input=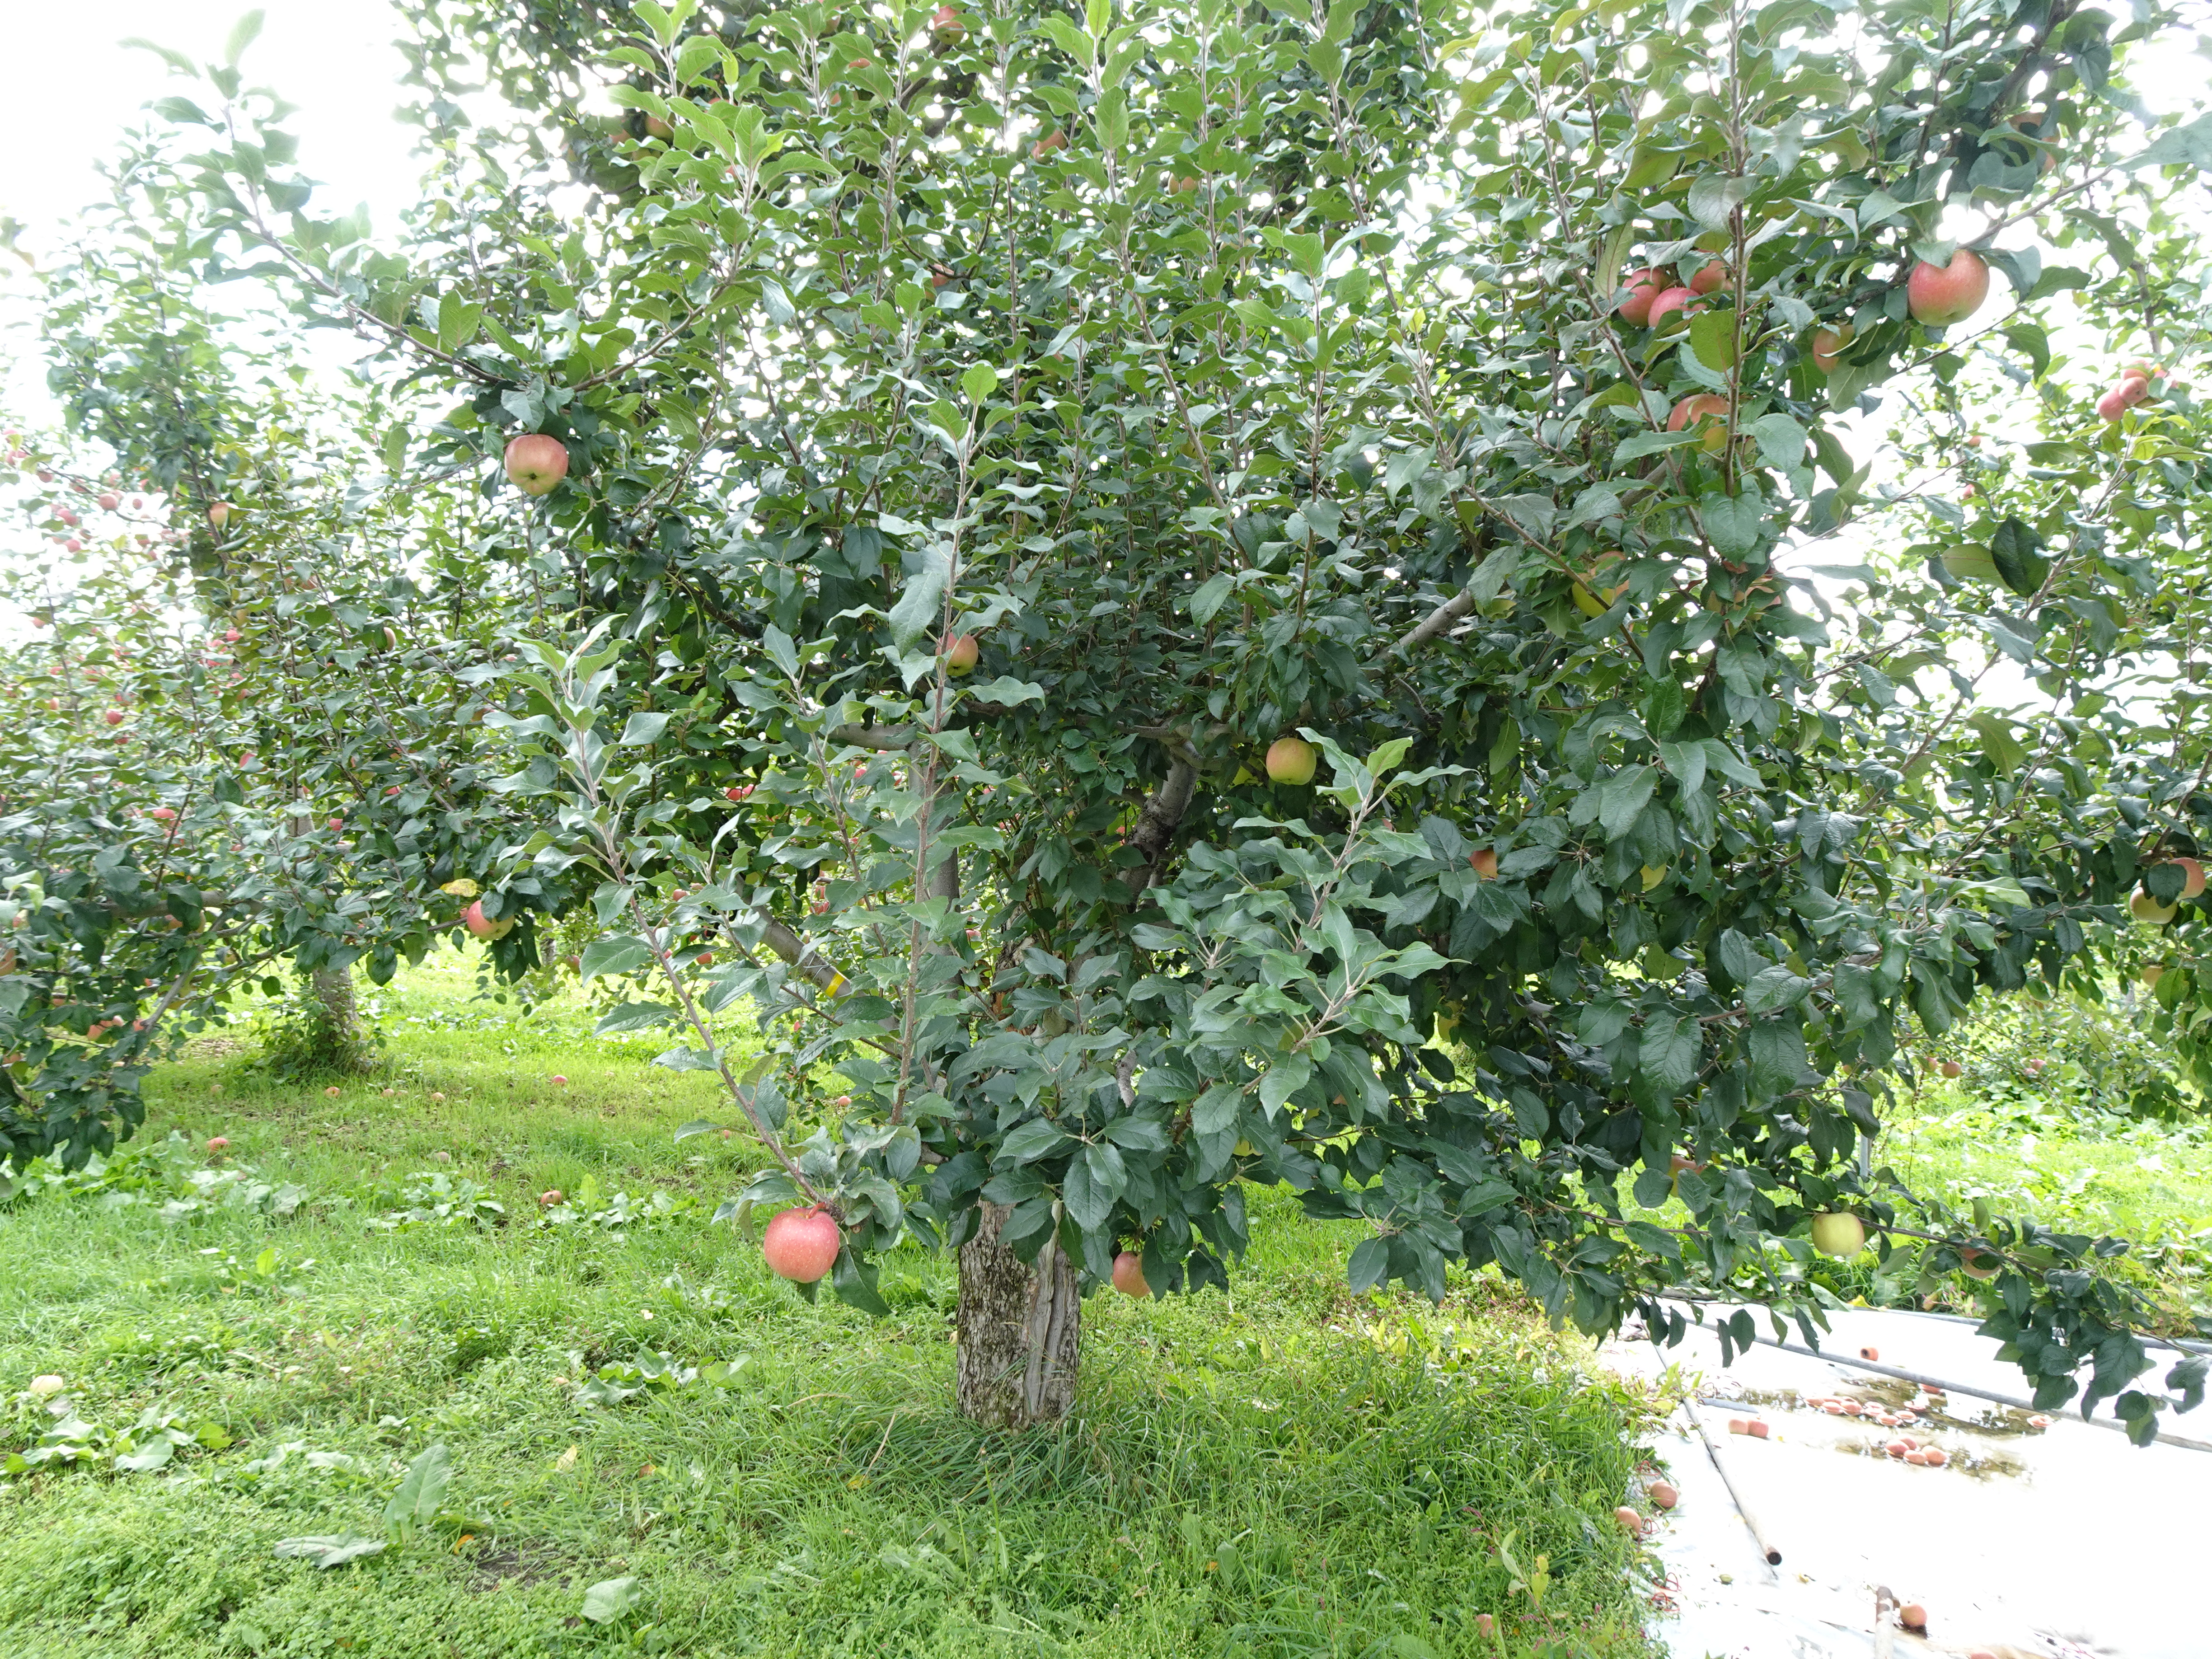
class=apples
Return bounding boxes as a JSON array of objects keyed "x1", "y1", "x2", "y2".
[
  {"x1": 2024, "y1": 1058, "x2": 2056, "y2": 1081},
  {"x1": 785, "y1": 1064, "x2": 806, "y2": 1083},
  {"x1": 832, "y1": 1094, "x2": 854, "y2": 1113},
  {"x1": 2130, "y1": 883, "x2": 2180, "y2": 926},
  {"x1": 646, "y1": 101, "x2": 684, "y2": 145},
  {"x1": 176, "y1": 911, "x2": 206, "y2": 936},
  {"x1": 298, "y1": 780, "x2": 313, "y2": 794},
  {"x1": 963, "y1": 927, "x2": 984, "y2": 950},
  {"x1": 454, "y1": 904, "x2": 471, "y2": 927},
  {"x1": 793, "y1": 572, "x2": 808, "y2": 587},
  {"x1": 1956, "y1": 1232, "x2": 2006, "y2": 1283},
  {"x1": 2148, "y1": 855, "x2": 2207, "y2": 903},
  {"x1": 823, "y1": 55, "x2": 882, "y2": 112},
  {"x1": 142, "y1": 975, "x2": 154, "y2": 989},
  {"x1": 643, "y1": 736, "x2": 663, "y2": 754},
  {"x1": 440, "y1": 677, "x2": 457, "y2": 695},
  {"x1": 2117, "y1": 376, "x2": 2148, "y2": 407},
  {"x1": 129, "y1": 603, "x2": 150, "y2": 620},
  {"x1": 1958, "y1": 479, "x2": 1986, "y2": 508},
  {"x1": 876, "y1": 744, "x2": 892, "y2": 763},
  {"x1": 1467, "y1": 842, "x2": 1515, "y2": 889},
  {"x1": 382, "y1": 782, "x2": 402, "y2": 800},
  {"x1": 122, "y1": 1017, "x2": 147, "y2": 1036},
  {"x1": 325, "y1": 659, "x2": 338, "y2": 673},
  {"x1": 1300, "y1": 1087, "x2": 1352, "y2": 1137},
  {"x1": 175, "y1": 866, "x2": 193, "y2": 883},
  {"x1": 1676, "y1": 245, "x2": 1727, "y2": 296},
  {"x1": 69, "y1": 476, "x2": 90, "y2": 494},
  {"x1": 1605, "y1": 829, "x2": 1668, "y2": 899},
  {"x1": 699, "y1": 93, "x2": 738, "y2": 125},
  {"x1": 974, "y1": 760, "x2": 986, "y2": 771},
  {"x1": 89, "y1": 1016, "x2": 122, "y2": 1045},
  {"x1": 1435, "y1": 996, "x2": 1481, "y2": 1043},
  {"x1": 1808, "y1": 319, "x2": 1874, "y2": 380},
  {"x1": 99, "y1": 491, "x2": 117, "y2": 511},
  {"x1": 35, "y1": 468, "x2": 56, "y2": 483},
  {"x1": 659, "y1": 946, "x2": 673, "y2": 959},
  {"x1": 150, "y1": 805, "x2": 177, "y2": 830},
  {"x1": 680, "y1": 921, "x2": 700, "y2": 942},
  {"x1": 158, "y1": 981, "x2": 195, "y2": 1010},
  {"x1": 370, "y1": 627, "x2": 396, "y2": 653},
  {"x1": 798, "y1": 0, "x2": 846, "y2": 36},
  {"x1": 133, "y1": 456, "x2": 155, "y2": 474},
  {"x1": 1658, "y1": 1152, "x2": 1712, "y2": 1199},
  {"x1": 996, "y1": 984, "x2": 1034, "y2": 1016},
  {"x1": 105, "y1": 469, "x2": 124, "y2": 486},
  {"x1": 1522, "y1": 798, "x2": 1565, "y2": 839},
  {"x1": 717, "y1": 163, "x2": 746, "y2": 186},
  {"x1": 83, "y1": 621, "x2": 99, "y2": 638},
  {"x1": 790, "y1": 1019, "x2": 813, "y2": 1038},
  {"x1": 121, "y1": 658, "x2": 139, "y2": 674},
  {"x1": 161, "y1": 528, "x2": 184, "y2": 546},
  {"x1": 1667, "y1": 392, "x2": 1756, "y2": 488},
  {"x1": 631, "y1": 689, "x2": 654, "y2": 714},
  {"x1": 81, "y1": 665, "x2": 107, "y2": 681},
  {"x1": 125, "y1": 806, "x2": 145, "y2": 826},
  {"x1": 1573, "y1": 549, "x2": 1651, "y2": 630},
  {"x1": 1718, "y1": 553, "x2": 1762, "y2": 602},
  {"x1": 1227, "y1": 1129, "x2": 1268, "y2": 1185},
  {"x1": 934, "y1": 627, "x2": 981, "y2": 678},
  {"x1": 46, "y1": 662, "x2": 66, "y2": 681},
  {"x1": 478, "y1": 741, "x2": 496, "y2": 761},
  {"x1": 467, "y1": 894, "x2": 517, "y2": 944},
  {"x1": 130, "y1": 498, "x2": 145, "y2": 512},
  {"x1": 337, "y1": 751, "x2": 358, "y2": 774},
  {"x1": 69, "y1": 652, "x2": 84, "y2": 664},
  {"x1": 1939, "y1": 1057, "x2": 1964, "y2": 1080},
  {"x1": 2123, "y1": 612, "x2": 2146, "y2": 635},
  {"x1": 923, "y1": 257, "x2": 971, "y2": 301},
  {"x1": 1022, "y1": 646, "x2": 1033, "y2": 655},
  {"x1": 2, "y1": 1048, "x2": 23, "y2": 1066},
  {"x1": 670, "y1": 886, "x2": 690, "y2": 907},
  {"x1": 559, "y1": 138, "x2": 592, "y2": 171},
  {"x1": 354, "y1": 924, "x2": 374, "y2": 940},
  {"x1": 0, "y1": 939, "x2": 19, "y2": 980},
  {"x1": 110, "y1": 730, "x2": 131, "y2": 746},
  {"x1": 983, "y1": 783, "x2": 1003, "y2": 802},
  {"x1": 998, "y1": 813, "x2": 1025, "y2": 839},
  {"x1": 929, "y1": 4, "x2": 975, "y2": 45},
  {"x1": 201, "y1": 638, "x2": 235, "y2": 669},
  {"x1": 1916, "y1": 1051, "x2": 1943, "y2": 1073},
  {"x1": 725, "y1": 773, "x2": 757, "y2": 808},
  {"x1": 6, "y1": 682, "x2": 24, "y2": 699},
  {"x1": 133, "y1": 531, "x2": 151, "y2": 547},
  {"x1": 1841, "y1": 1055, "x2": 1869, "y2": 1079},
  {"x1": 65, "y1": 540, "x2": 83, "y2": 556},
  {"x1": 1265, "y1": 735, "x2": 1318, "y2": 787},
  {"x1": 114, "y1": 644, "x2": 132, "y2": 662},
  {"x1": 853, "y1": 895, "x2": 865, "y2": 907},
  {"x1": 809, "y1": 900, "x2": 837, "y2": 919},
  {"x1": 1167, "y1": 162, "x2": 1210, "y2": 203},
  {"x1": 1113, "y1": 822, "x2": 1138, "y2": 847},
  {"x1": 1618, "y1": 267, "x2": 1681, "y2": 329},
  {"x1": 1747, "y1": 563, "x2": 1778, "y2": 592},
  {"x1": 852, "y1": 762, "x2": 873, "y2": 784},
  {"x1": 142, "y1": 476, "x2": 164, "y2": 492},
  {"x1": 470, "y1": 701, "x2": 496, "y2": 731},
  {"x1": 808, "y1": 865, "x2": 827, "y2": 886},
  {"x1": 105, "y1": 712, "x2": 124, "y2": 726},
  {"x1": 210, "y1": 501, "x2": 240, "y2": 527},
  {"x1": 2120, "y1": 363, "x2": 2155, "y2": 390},
  {"x1": 1112, "y1": 1247, "x2": 1156, "y2": 1298},
  {"x1": 219, "y1": 947, "x2": 239, "y2": 966},
  {"x1": 229, "y1": 843, "x2": 248, "y2": 858},
  {"x1": 812, "y1": 885, "x2": 834, "y2": 901},
  {"x1": 226, "y1": 626, "x2": 245, "y2": 643},
  {"x1": 57, "y1": 866, "x2": 80, "y2": 888},
  {"x1": 166, "y1": 830, "x2": 188, "y2": 849},
  {"x1": 1006, "y1": 1023, "x2": 1036, "y2": 1048},
  {"x1": 849, "y1": 837, "x2": 862, "y2": 848},
  {"x1": 158, "y1": 912, "x2": 179, "y2": 933},
  {"x1": 497, "y1": 653, "x2": 520, "y2": 675},
  {"x1": 114, "y1": 687, "x2": 136, "y2": 707},
  {"x1": 30, "y1": 614, "x2": 49, "y2": 630},
  {"x1": 1968, "y1": 432, "x2": 1995, "y2": 454},
  {"x1": 42, "y1": 695, "x2": 60, "y2": 711},
  {"x1": 839, "y1": 647, "x2": 851, "y2": 660},
  {"x1": 142, "y1": 549, "x2": 158, "y2": 562},
  {"x1": 2142, "y1": 962, "x2": 2174, "y2": 990},
  {"x1": 560, "y1": 952, "x2": 585, "y2": 973},
  {"x1": 238, "y1": 751, "x2": 262, "y2": 772},
  {"x1": 169, "y1": 484, "x2": 193, "y2": 503},
  {"x1": 2097, "y1": 390, "x2": 2129, "y2": 423},
  {"x1": 1034, "y1": 118, "x2": 1069, "y2": 155},
  {"x1": 688, "y1": 917, "x2": 711, "y2": 937},
  {"x1": 947, "y1": 771, "x2": 961, "y2": 782},
  {"x1": 1698, "y1": 585, "x2": 1787, "y2": 653},
  {"x1": 388, "y1": 741, "x2": 418, "y2": 770},
  {"x1": 57, "y1": 508, "x2": 82, "y2": 527},
  {"x1": 1227, "y1": 747, "x2": 1265, "y2": 790},
  {"x1": 604, "y1": 116, "x2": 643, "y2": 157},
  {"x1": 884, "y1": 769, "x2": 903, "y2": 787},
  {"x1": 686, "y1": 880, "x2": 705, "y2": 898},
  {"x1": 1650, "y1": 286, "x2": 1711, "y2": 353},
  {"x1": 2, "y1": 426, "x2": 22, "y2": 443},
  {"x1": 1905, "y1": 240, "x2": 1993, "y2": 329},
  {"x1": 1472, "y1": 578, "x2": 1517, "y2": 622},
  {"x1": 2144, "y1": 369, "x2": 2168, "y2": 388},
  {"x1": 695, "y1": 949, "x2": 720, "y2": 970},
  {"x1": 220, "y1": 673, "x2": 247, "y2": 699},
  {"x1": 2009, "y1": 133, "x2": 2060, "y2": 182},
  {"x1": 235, "y1": 606, "x2": 252, "y2": 623},
  {"x1": 283, "y1": 560, "x2": 319, "y2": 590},
  {"x1": 329, "y1": 816, "x2": 348, "y2": 836},
  {"x1": 1809, "y1": 1211, "x2": 1869, "y2": 1262},
  {"x1": 505, "y1": 429, "x2": 569, "y2": 498},
  {"x1": 6, "y1": 448, "x2": 28, "y2": 469},
  {"x1": 12, "y1": 907, "x2": 39, "y2": 938},
  {"x1": 763, "y1": 1204, "x2": 842, "y2": 1286},
  {"x1": 50, "y1": 999, "x2": 76, "y2": 1015}
]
